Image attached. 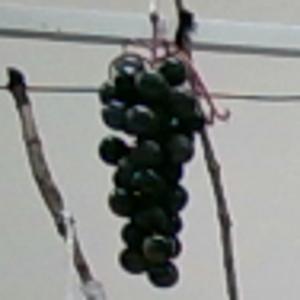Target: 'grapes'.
Wrapping results in <instances>:
<instances>
[{
    "label": "grapes",
    "instance_id": "obj_1",
    "mask_svg": "<svg viewBox=\"0 0 300 300\" xmlns=\"http://www.w3.org/2000/svg\"><path fill=\"white\" fill-rule=\"evenodd\" d=\"M115 72L114 80L99 88V118L110 131L135 141L129 147L121 136L106 135L97 155L116 167L115 187L107 196L110 212L128 220L117 231L126 247L119 263L128 275L145 273L158 288L170 289L180 279L173 261L183 252L177 237L185 221L178 212L190 202L180 186L182 167L195 157V134L204 130L207 117L198 99L182 88L192 72L188 60L170 56L153 69L147 61L125 55Z\"/></svg>",
    "mask_w": 300,
    "mask_h": 300
}]
</instances>
